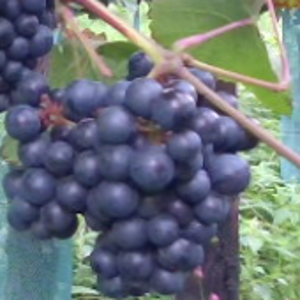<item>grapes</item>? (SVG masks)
<instances>
[{"label":"grapes","instance_id":"grapes-1","mask_svg":"<svg viewBox=\"0 0 300 300\" xmlns=\"http://www.w3.org/2000/svg\"><path fill=\"white\" fill-rule=\"evenodd\" d=\"M153 66L149 52H134L129 76L111 90L87 78L49 89L31 71L20 82L27 106H13L5 119L26 168L1 182L10 223L66 238L77 229L75 213L85 212L87 225L102 232L90 264L110 298L152 287L181 294L186 272L203 263L202 244L231 210V194L250 176L237 152L253 136L188 80L149 79Z\"/></svg>","mask_w":300,"mask_h":300},{"label":"grapes","instance_id":"grapes-2","mask_svg":"<svg viewBox=\"0 0 300 300\" xmlns=\"http://www.w3.org/2000/svg\"><path fill=\"white\" fill-rule=\"evenodd\" d=\"M192 73L199 76L202 80H204L209 88L213 87V83L215 82L213 75H211L210 73H203L197 69H193Z\"/></svg>","mask_w":300,"mask_h":300}]
</instances>
